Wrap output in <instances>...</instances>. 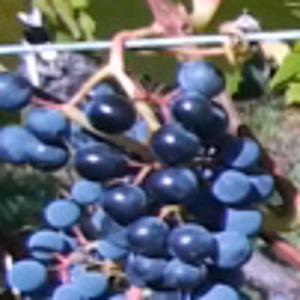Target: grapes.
Segmentation results:
<instances>
[{
    "label": "grapes",
    "instance_id": "1",
    "mask_svg": "<svg viewBox=\"0 0 300 300\" xmlns=\"http://www.w3.org/2000/svg\"><path fill=\"white\" fill-rule=\"evenodd\" d=\"M181 93L168 105L166 121L149 135L143 118L108 82L81 103L82 124L52 109L31 110L24 125L0 126V160L42 175L61 173L75 149L72 170L81 179L69 199L46 198L42 223L22 244L27 258L3 273L1 287L38 300H243L229 280L210 271L234 272L254 259L251 241L265 215L253 199L275 190L271 174L253 176L262 153L249 138H235L215 155L216 168H182L200 142H215L231 114L214 95L231 77L210 60L176 69ZM147 141L165 167L142 182L122 180L130 161L117 144L95 134Z\"/></svg>",
    "mask_w": 300,
    "mask_h": 300
},
{
    "label": "grapes",
    "instance_id": "2",
    "mask_svg": "<svg viewBox=\"0 0 300 300\" xmlns=\"http://www.w3.org/2000/svg\"><path fill=\"white\" fill-rule=\"evenodd\" d=\"M34 97L33 86L14 72H0V110L18 111Z\"/></svg>",
    "mask_w": 300,
    "mask_h": 300
}]
</instances>
